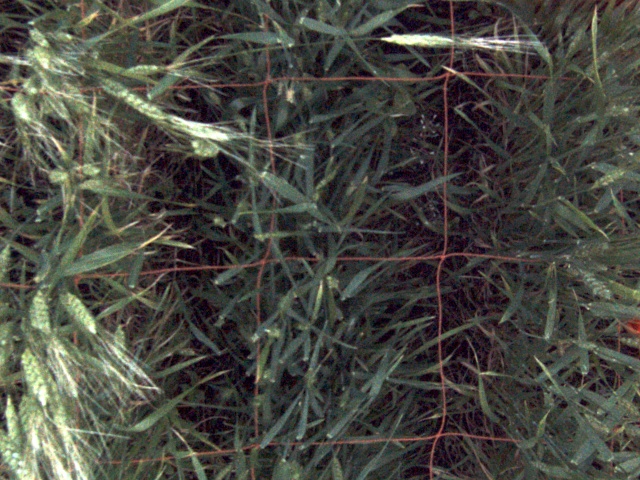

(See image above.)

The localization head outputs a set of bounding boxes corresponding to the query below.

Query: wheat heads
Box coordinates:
[43,373,70,418]
[577,272,610,299]
[28,293,51,338]
[0,432,39,478]
[26,348,46,405]
[27,28,52,48]
[49,170,70,183]
[379,31,451,50]
[122,61,162,74]
[590,168,619,189]
[76,161,100,174]
[12,95,31,123]
[6,396,17,437]
[1,242,10,278]
[103,78,164,121]
[0,319,13,362]
[61,296,98,338]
